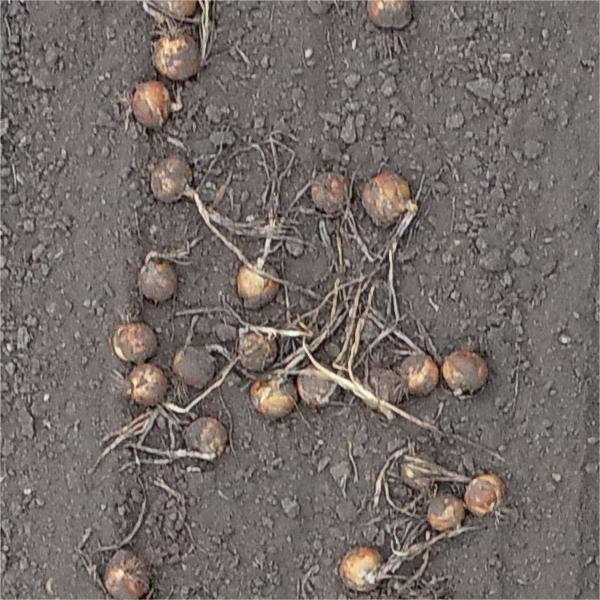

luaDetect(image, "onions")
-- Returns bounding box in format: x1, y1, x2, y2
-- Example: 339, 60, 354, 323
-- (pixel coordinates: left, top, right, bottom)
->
154, 33, 197, 79
465, 474, 502, 512
310, 172, 347, 210
442, 350, 487, 393
101, 552, 145, 594
113, 322, 156, 362
125, 363, 166, 404
425, 493, 464, 530
362, 173, 412, 222
236, 260, 276, 299
177, 346, 214, 389
129, 81, 172, 125
399, 353, 438, 393
237, 328, 275, 369
139, 256, 177, 299
250, 373, 293, 416
150, 0, 199, 14
144, 152, 192, 200
368, 0, 410, 29
298, 370, 331, 406
338, 546, 381, 586
186, 416, 225, 456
